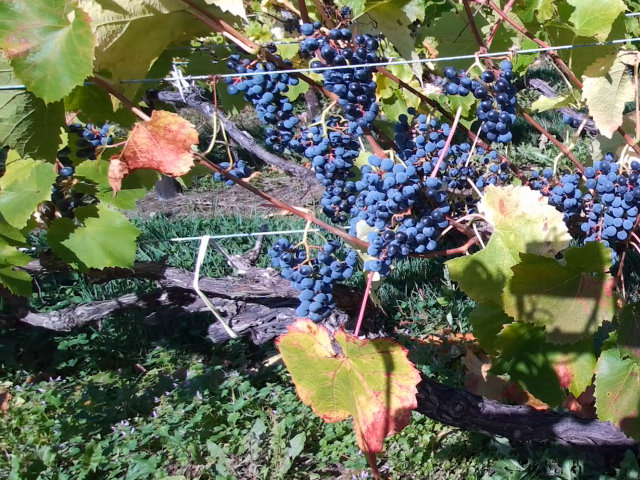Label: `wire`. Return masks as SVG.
Wrapping results in <instances>:
<instances>
[{
  "mask_svg": "<svg viewBox=\"0 0 640 480\" xmlns=\"http://www.w3.org/2000/svg\"><path fill=\"white\" fill-rule=\"evenodd\" d=\"M474 55L468 53L462 56L451 57H430L426 59H410L405 61H388L383 63H357V64H342L334 66L324 67H305L294 68L289 70H253L243 73H230V74H201V75H187V76H160L150 78H132L121 80V85H129L134 83H153L162 81H190V80H204V79H233L252 77L255 75H292L297 73L307 72H327L345 69H359V68H385L390 66H407L412 64H428L433 62H453V61H465L467 59H473Z\"/></svg>",
  "mask_w": 640,
  "mask_h": 480,
  "instance_id": "obj_1",
  "label": "wire"
},
{
  "mask_svg": "<svg viewBox=\"0 0 640 480\" xmlns=\"http://www.w3.org/2000/svg\"><path fill=\"white\" fill-rule=\"evenodd\" d=\"M633 42H640V37H630V38H624V39H609V40H603V41H582V42H577L572 44L549 45V46L533 47V48L522 49V50H508V51H502L498 53H479L478 57L479 58H500V57H505L510 55H525V54H531L535 52H546L551 50L575 49V48L584 47V46H606L611 44H626V43H633Z\"/></svg>",
  "mask_w": 640,
  "mask_h": 480,
  "instance_id": "obj_2",
  "label": "wire"
},
{
  "mask_svg": "<svg viewBox=\"0 0 640 480\" xmlns=\"http://www.w3.org/2000/svg\"><path fill=\"white\" fill-rule=\"evenodd\" d=\"M304 229H287L283 231H259V232H241L230 233L225 235H210V240H227L232 238H244V237H261V236H286L289 234H304Z\"/></svg>",
  "mask_w": 640,
  "mask_h": 480,
  "instance_id": "obj_3",
  "label": "wire"
},
{
  "mask_svg": "<svg viewBox=\"0 0 640 480\" xmlns=\"http://www.w3.org/2000/svg\"><path fill=\"white\" fill-rule=\"evenodd\" d=\"M204 239L203 235L199 236H166V237H157V238H143L137 241L138 245L146 244V243H160V242H168V241H202Z\"/></svg>",
  "mask_w": 640,
  "mask_h": 480,
  "instance_id": "obj_4",
  "label": "wire"
}]
</instances>
